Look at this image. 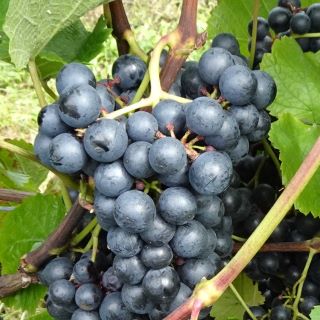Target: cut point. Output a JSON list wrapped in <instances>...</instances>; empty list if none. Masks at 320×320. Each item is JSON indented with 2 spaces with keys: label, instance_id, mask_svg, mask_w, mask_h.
Instances as JSON below:
<instances>
[{
  "label": "cut point",
  "instance_id": "cut-point-2",
  "mask_svg": "<svg viewBox=\"0 0 320 320\" xmlns=\"http://www.w3.org/2000/svg\"><path fill=\"white\" fill-rule=\"evenodd\" d=\"M124 37L129 42L130 50L127 55H138L140 58H142L145 62L147 60V54L144 53L141 48L138 46L137 41L135 39V34L131 30H126L124 33Z\"/></svg>",
  "mask_w": 320,
  "mask_h": 320
},
{
  "label": "cut point",
  "instance_id": "cut-point-1",
  "mask_svg": "<svg viewBox=\"0 0 320 320\" xmlns=\"http://www.w3.org/2000/svg\"><path fill=\"white\" fill-rule=\"evenodd\" d=\"M178 39V31L177 29L174 30L172 33L166 35L163 37L161 40H159L152 53H151V58H150V65L149 69L147 70L140 86L139 89L132 101V104L118 109L112 113H106L104 110L101 111V114L103 117L96 119L101 120L104 118H111L114 119L116 117H119L127 112H130L132 110L141 108V107H146V106H151L152 109L160 102V100H166V99H172L175 101H178L179 103L183 105H187V103L192 102L193 100L178 97L171 95L161 89V84H160V79L158 75L159 71V56L162 48L166 45H168L171 49L176 45ZM150 81V96L148 98H142L143 93ZM142 98V99H141ZM141 99V100H140ZM139 102V103H136ZM136 103V104H134Z\"/></svg>",
  "mask_w": 320,
  "mask_h": 320
}]
</instances>
